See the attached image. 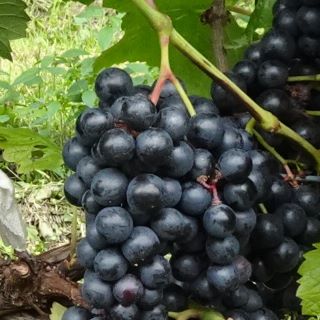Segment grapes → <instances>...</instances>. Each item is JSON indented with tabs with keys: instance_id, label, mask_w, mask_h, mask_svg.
<instances>
[{
	"instance_id": "obj_1",
	"label": "grapes",
	"mask_w": 320,
	"mask_h": 320,
	"mask_svg": "<svg viewBox=\"0 0 320 320\" xmlns=\"http://www.w3.org/2000/svg\"><path fill=\"white\" fill-rule=\"evenodd\" d=\"M100 72L98 106L77 118L63 158L65 199L82 207L76 258L85 301L61 320H168L200 301L234 320H279L244 284L287 288L302 248L320 242V183L283 182L285 169L244 131L252 114L213 80L211 100L175 86Z\"/></svg>"
},
{
	"instance_id": "obj_3",
	"label": "grapes",
	"mask_w": 320,
	"mask_h": 320,
	"mask_svg": "<svg viewBox=\"0 0 320 320\" xmlns=\"http://www.w3.org/2000/svg\"><path fill=\"white\" fill-rule=\"evenodd\" d=\"M255 130L263 137L264 141L268 143L286 160H296L297 155L301 156L299 163L306 164L305 167L299 166L300 172L298 173L296 164L288 163V167L294 176L300 175L301 179H305L306 176H316L317 172L314 167V162L310 155L302 149L297 143L292 141L286 136L279 134H271L260 129L258 122L255 125Z\"/></svg>"
},
{
	"instance_id": "obj_2",
	"label": "grapes",
	"mask_w": 320,
	"mask_h": 320,
	"mask_svg": "<svg viewBox=\"0 0 320 320\" xmlns=\"http://www.w3.org/2000/svg\"><path fill=\"white\" fill-rule=\"evenodd\" d=\"M272 28L223 75L265 111L320 149V81L287 82L320 74V0H276Z\"/></svg>"
}]
</instances>
